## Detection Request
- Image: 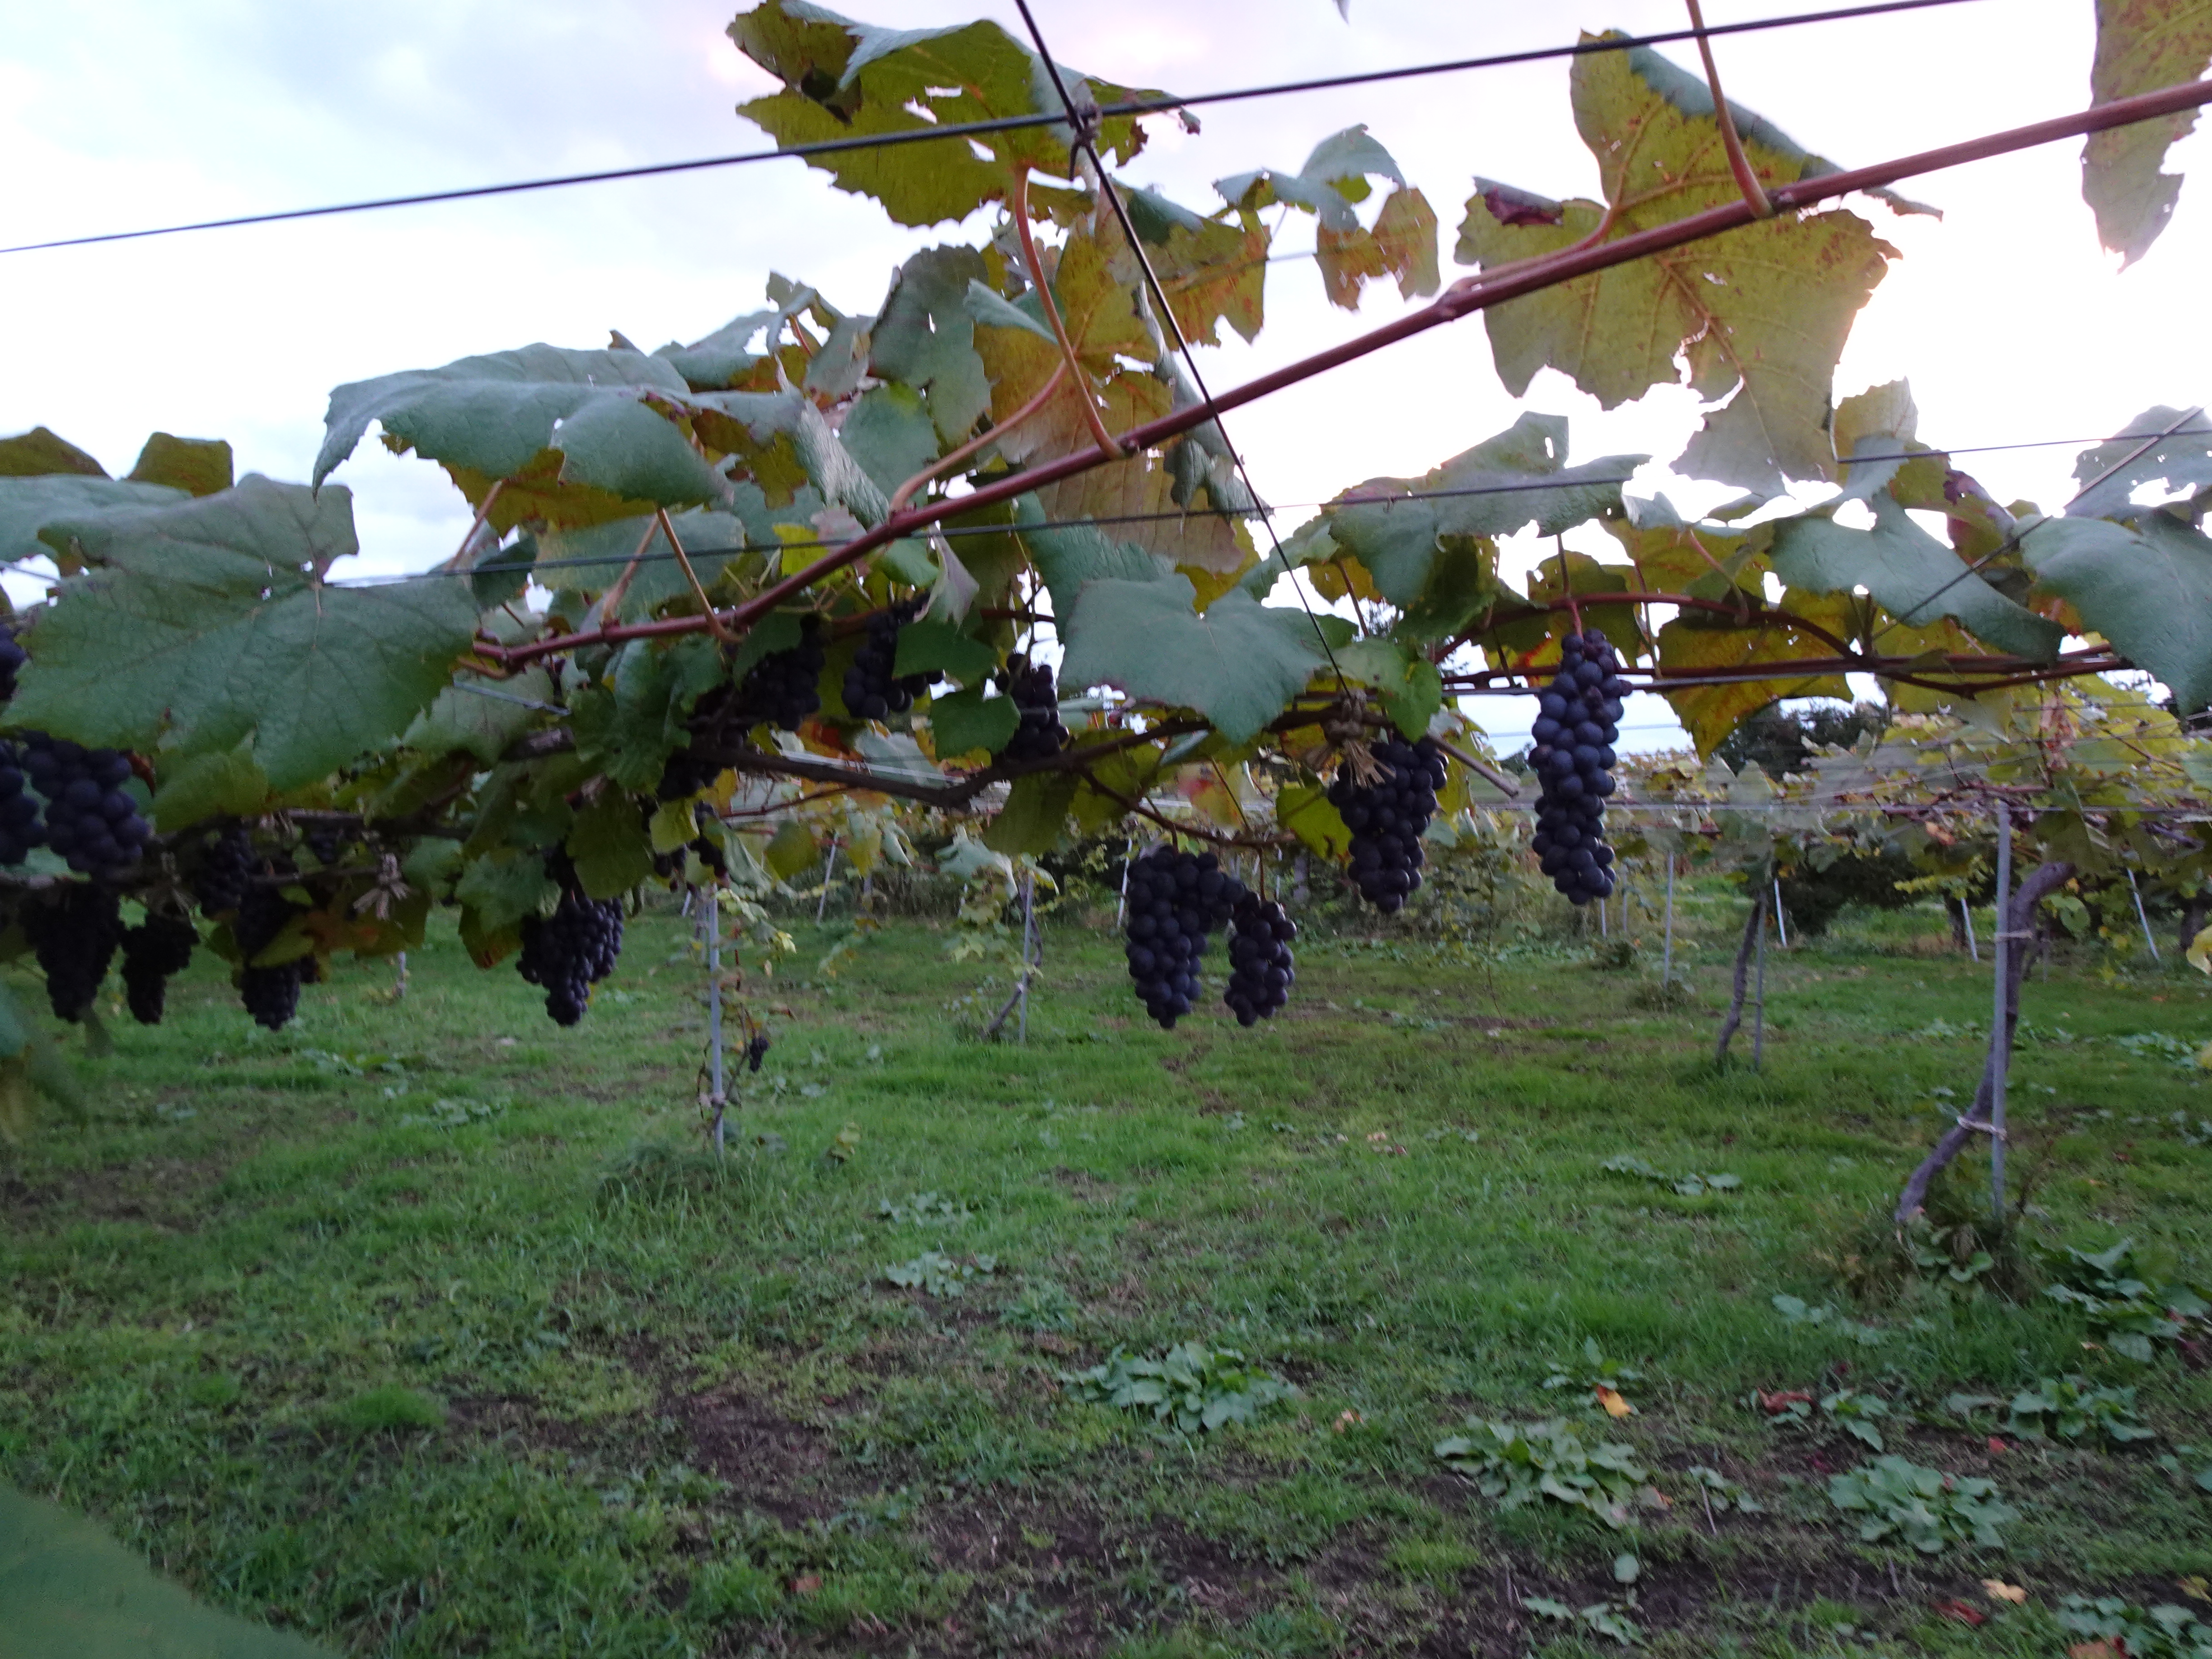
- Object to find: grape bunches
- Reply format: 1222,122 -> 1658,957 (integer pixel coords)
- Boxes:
637,795 -> 689,876
230,887 -> 319,1031
293,814 -> 357,864
184,818 -> 259,920
744,1029 -> 773,1075
19,877 -> 123,1022
1124,843 -> 1245,1029
117,909 -> 201,1024
17,729 -> 154,890
1224,890 -> 1299,1028
736,610 -> 824,731
541,909 -> 590,1027
515,911 -> 542,984
993,653 -> 1070,761
0,740 -> 45,867
685,802 -> 732,878
0,634 -> 25,706
1325,734 -> 1450,916
655,678 -> 748,799
1527,629 -> 1624,812
578,895 -> 623,984
1530,772 -> 1617,904
841,587 -> 945,721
